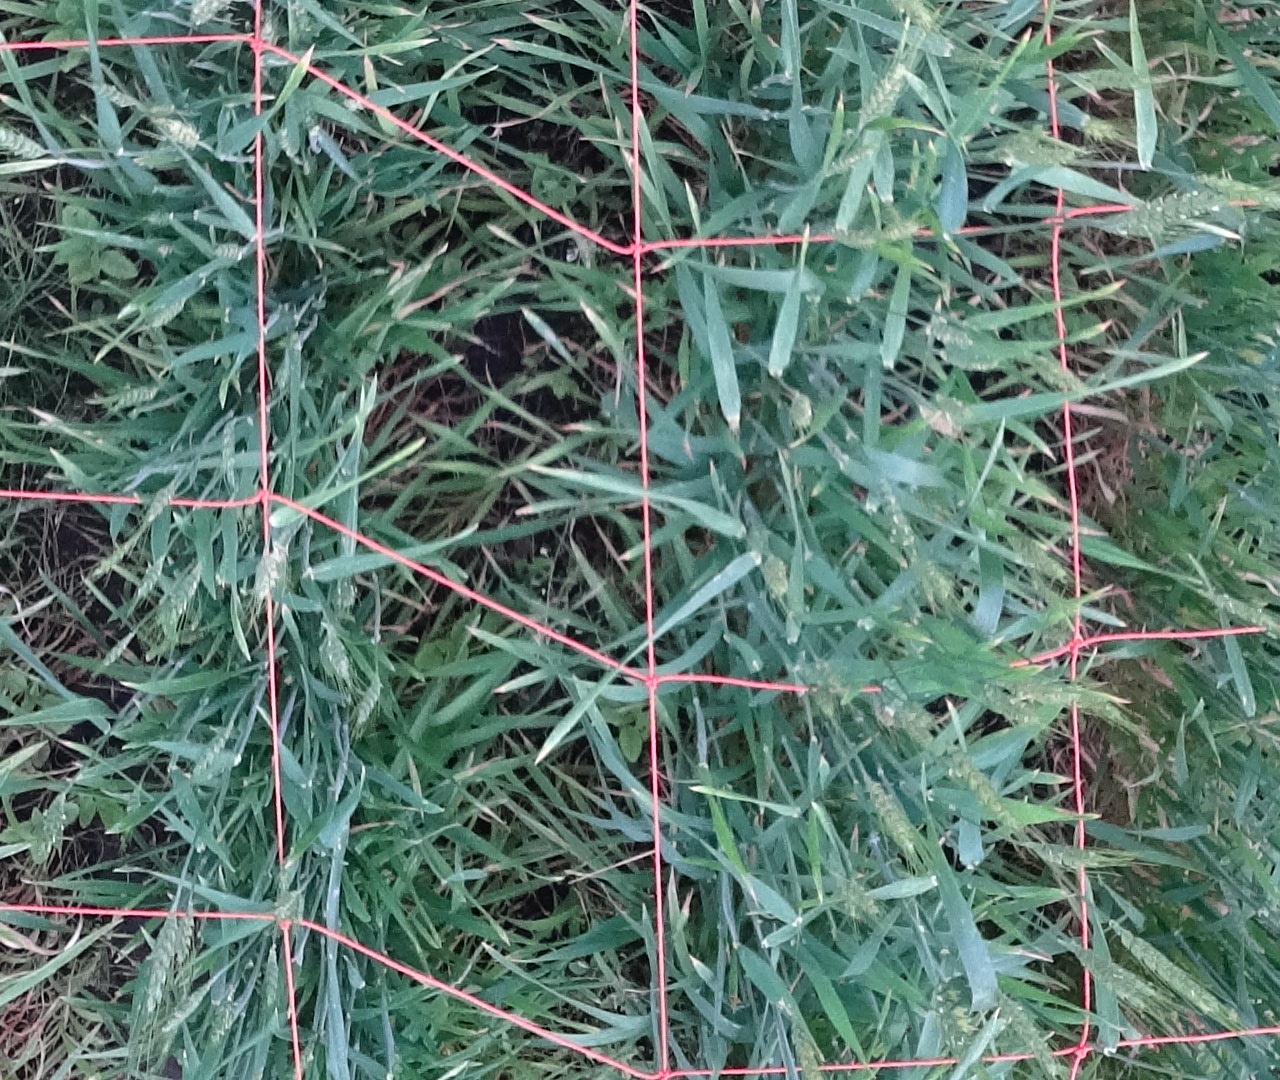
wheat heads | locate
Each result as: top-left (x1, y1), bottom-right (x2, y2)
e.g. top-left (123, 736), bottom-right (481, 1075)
top-left (146, 296), bottom-right (183, 326)
top-left (924, 313), bottom-right (966, 354)
top-left (1008, 531), bottom-right (1067, 581)
top-left (0, 125), bottom-right (50, 160)
top-left (358, 682), bottom-right (386, 716)
top-left (139, 551), bottom-right (164, 591)
top-left (195, 735), bottom-right (221, 768)
top-left (173, 916), bottom-right (192, 956)
top-left (1111, 913), bottom-right (1236, 1023)
top-left (824, 152), bottom-right (881, 176)
top-left (757, 548), bottom-right (791, 604)
top-left (143, 917), bottom-right (174, 999)
top-left (830, 223), bottom-right (918, 246)
top-left (913, 394), bottom-right (961, 442)
top-left (152, 482), bottom-right (179, 513)
top-left (897, 700), bottom-right (938, 749)
top-left (855, 776), bottom-right (917, 853)
top-left (1023, 354), bottom-right (1094, 399)
top-left (1004, 148), bottom-right (1069, 167)
top-left (1057, 938), bottom-right (1148, 1003)
top-left (244, 19), bottom-right (273, 54)
top-left (112, 380), bottom-right (158, 406)
top-left (87, 82), bottom-right (136, 111)
top-left (1032, 841), bottom-right (1098, 878)
top-left (992, 674), bottom-right (1103, 712)
top-left (1095, 188), bottom-right (1224, 226)
top-left (256, 548), bottom-right (281, 600)
top-left (1079, 60), bottom-right (1141, 94)
top-left (101, 628), bottom-right (132, 663)
top-left (839, 880), bottom-right (889, 923)
top-left (216, 999), bottom-right (242, 1036)
top-left (918, 563), bottom-right (947, 597)
top-left (210, 230), bottom-right (245, 258)
top-left (782, 1023), bottom-right (825, 1080)
top-left (192, 0), bottom-right (223, 23)
top-left (867, 473), bottom-right (912, 544)
top-left (324, 628), bottom-right (350, 675)
top-left (1217, 585), bottom-right (1273, 643)
top-left (788, 394), bottom-right (831, 431)
top-left (168, 564), bottom-right (201, 617)
top-left (955, 766), bottom-right (1016, 825)
top-left (45, 789), bottom-right (67, 841)
top-left (148, 113), bottom-right (202, 148)
top-left (257, 947), bottom-right (281, 1005)
top-left (894, 0), bottom-right (935, 24)
top-left (168, 982), bottom-right (208, 1034)
top-left (861, 62), bottom-right (907, 121)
